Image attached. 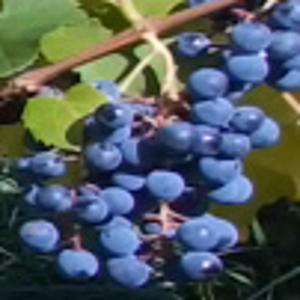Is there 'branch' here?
Masks as SVG:
<instances>
[{"label":"branch","instance_id":"1","mask_svg":"<svg viewBox=\"0 0 300 300\" xmlns=\"http://www.w3.org/2000/svg\"><path fill=\"white\" fill-rule=\"evenodd\" d=\"M247 0H211L195 4L165 17L163 20L136 24L103 41L88 46L44 69L34 68L12 77L0 86V105L9 106L16 98H28L41 87L52 84L62 74L80 65H88L94 59H108L134 46L143 45L199 17H207L230 7H243Z\"/></svg>","mask_w":300,"mask_h":300}]
</instances>
